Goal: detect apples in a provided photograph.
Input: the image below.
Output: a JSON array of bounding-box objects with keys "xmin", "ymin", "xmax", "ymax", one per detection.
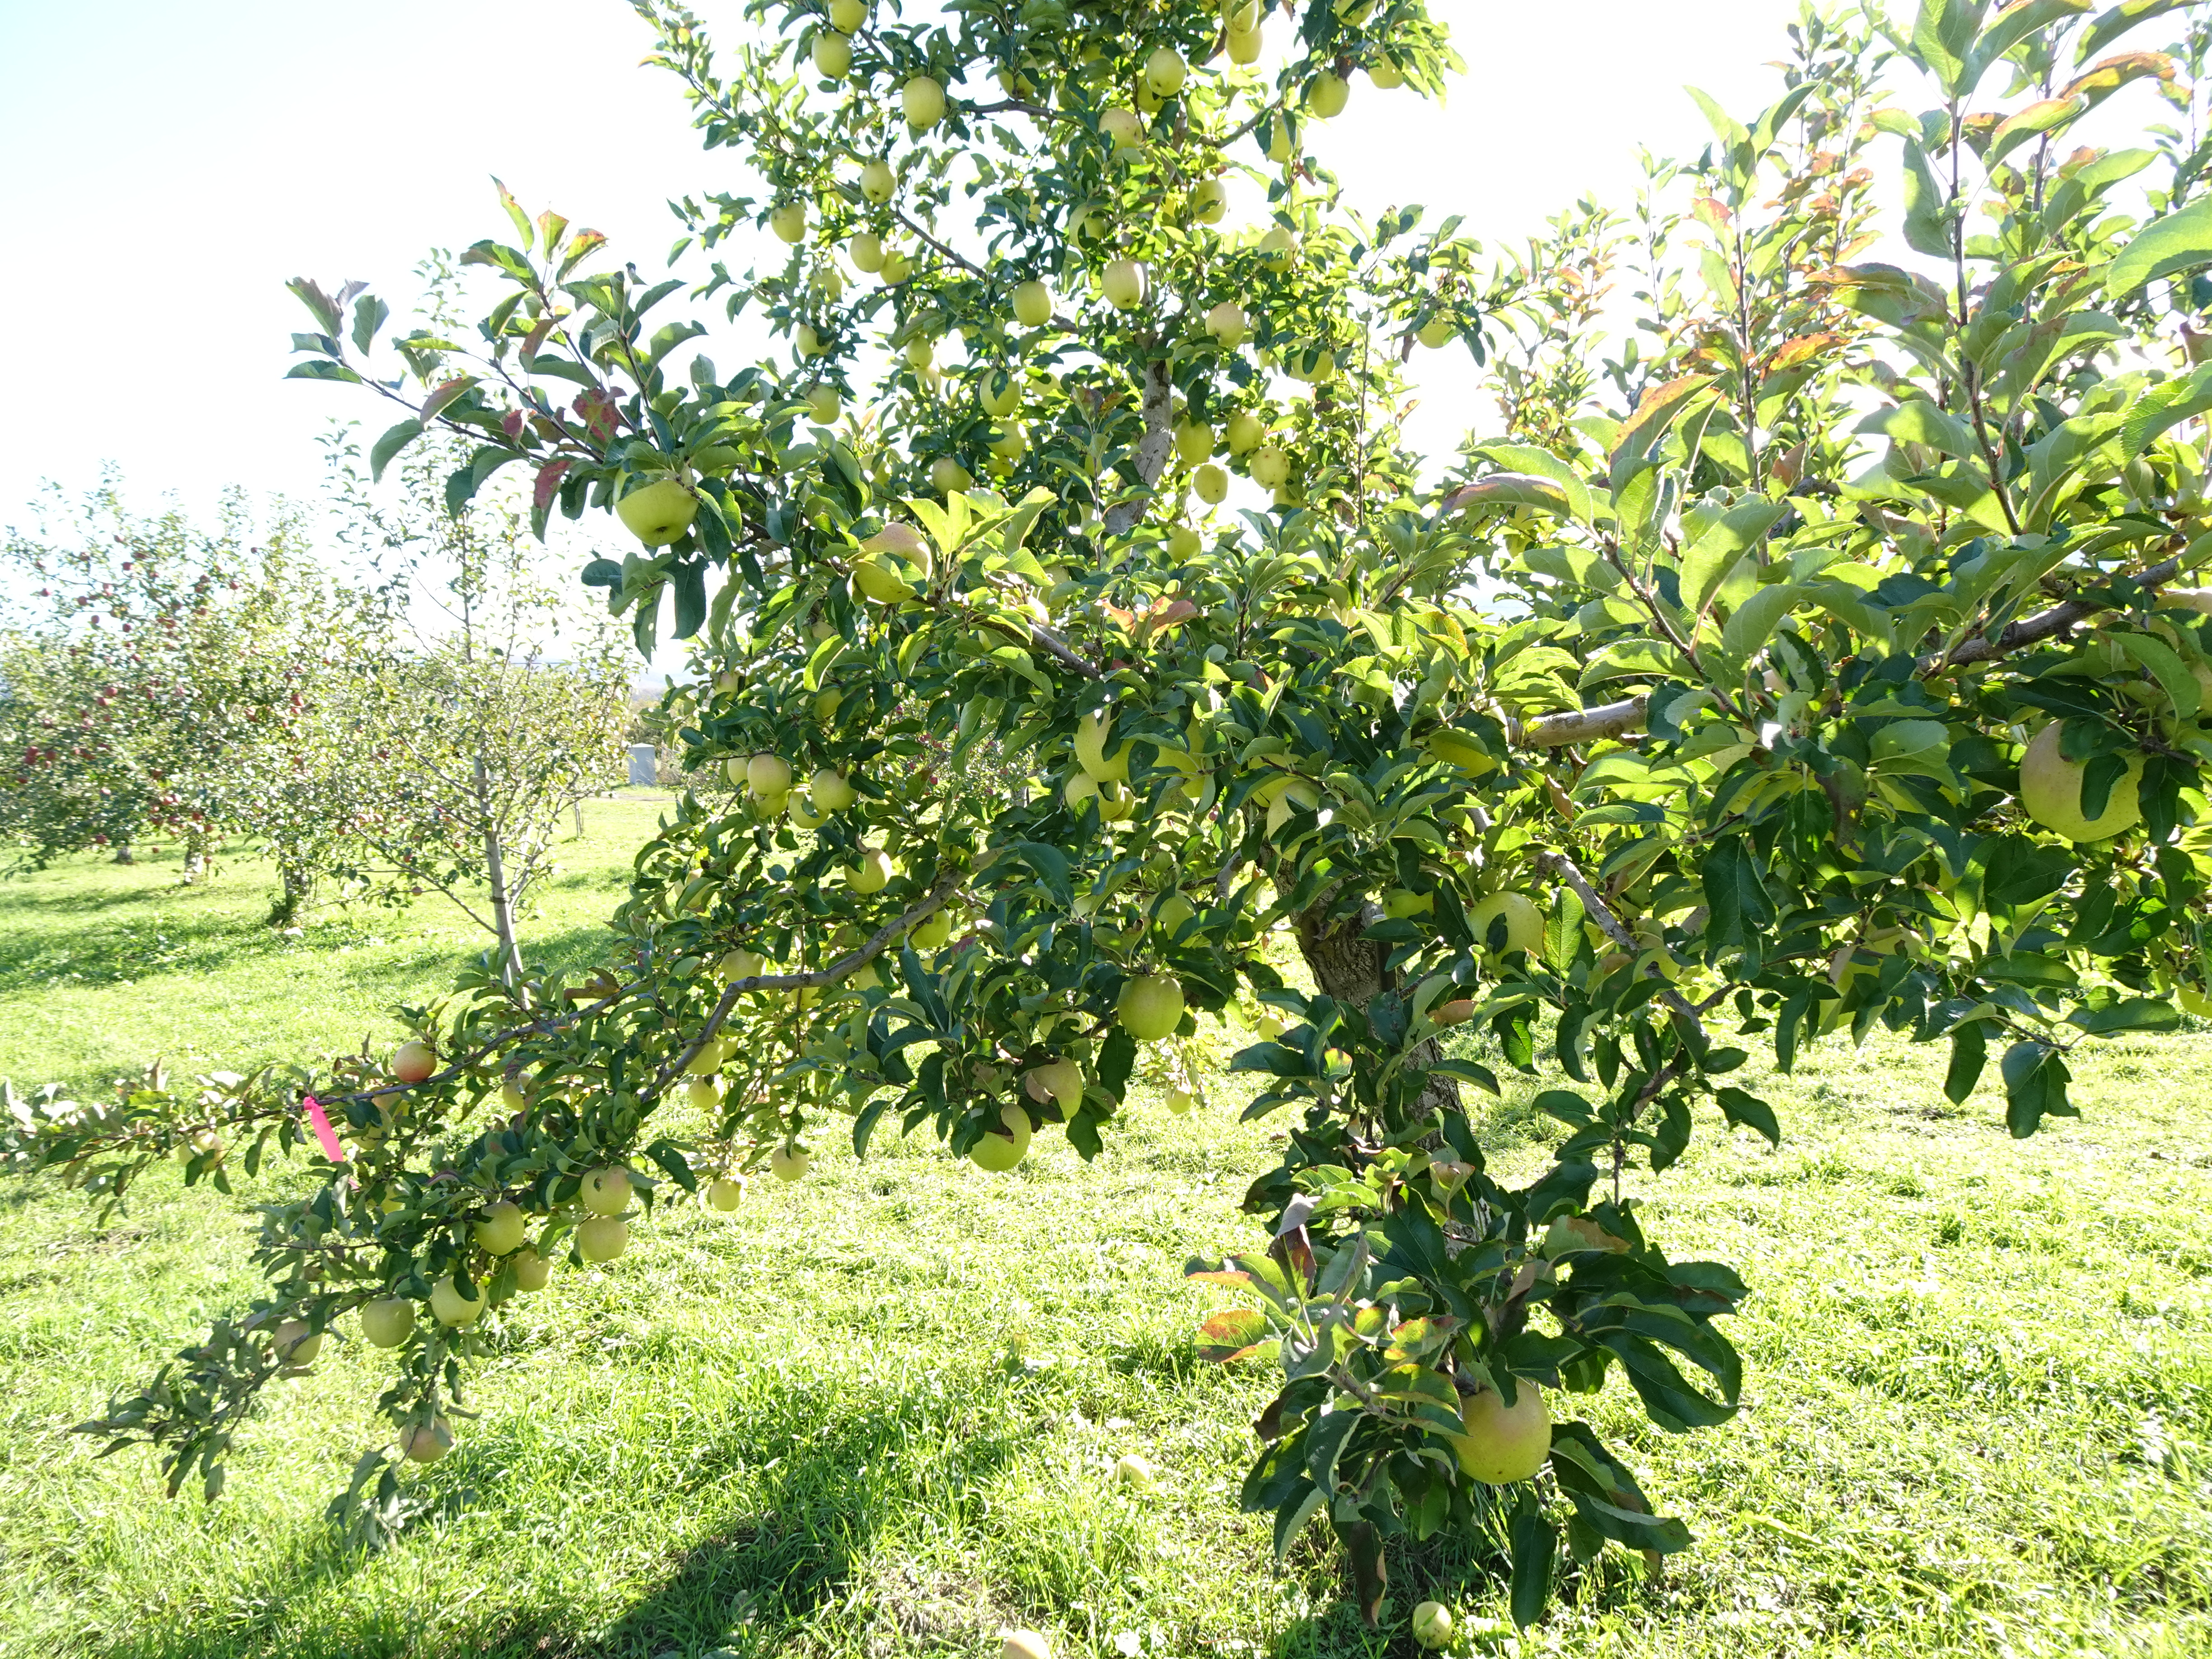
[
  {"xmin": 1259, "ymin": 226, "xmax": 1299, "ymax": 271},
  {"xmin": 1194, "ymin": 179, "xmax": 1231, "ymax": 225},
  {"xmin": 1374, "ymin": 480, "xmax": 1400, "ymax": 508},
  {"xmin": 1081, "ymin": 36, "xmax": 1119, "ymax": 73},
  {"xmin": 843, "ymin": 844, "xmax": 892, "ymax": 894},
  {"xmin": 2099, "ymin": 614, "xmax": 2181, "ymax": 671},
  {"xmin": 802, "ymin": 618, "xmax": 838, "ymax": 661},
  {"xmin": 344, "ymin": 1109, "xmax": 393, "ymax": 1151},
  {"xmin": 682, "ymin": 1031, "xmax": 726, "ymax": 1076},
  {"xmin": 1503, "ymin": 495, "xmax": 1543, "ymax": 533},
  {"xmin": 746, "ymin": 749, "xmax": 794, "ymax": 798},
  {"xmin": 272, "ymin": 1318, "xmax": 324, "ymax": 1367},
  {"xmin": 1308, "ymin": 70, "xmax": 1351, "ymax": 119},
  {"xmin": 1367, "ymin": 42, "xmax": 1406, "ymax": 91},
  {"xmin": 1014, "ymin": 281, "xmax": 1055, "ymax": 328},
  {"xmin": 859, "ymin": 155, "xmax": 900, "ymax": 205},
  {"xmin": 1064, "ymin": 766, "xmax": 1127, "ymax": 825},
  {"xmin": 755, "ymin": 786, "xmax": 792, "ymax": 823},
  {"xmin": 1018, "ymin": 0, "xmax": 1068, "ymax": 43},
  {"xmin": 771, "ymin": 1144, "xmax": 810, "ymax": 1185},
  {"xmin": 1165, "ymin": 524, "xmax": 1204, "ymax": 565},
  {"xmin": 1208, "ymin": 808, "xmax": 1222, "ymax": 822},
  {"xmin": 1811, "ymin": 420, "xmax": 1831, "ymax": 437},
  {"xmin": 362, "ymin": 1292, "xmax": 415, "ymax": 1349},
  {"xmin": 577, "ymin": 1218, "xmax": 628, "ymax": 1262},
  {"xmin": 1070, "ymin": 384, "xmax": 1106, "ymax": 418},
  {"xmin": 1100, "ymin": 786, "xmax": 1139, "ymax": 824},
  {"xmin": 1848, "ymin": 655, "xmax": 1858, "ymax": 665},
  {"xmin": 1426, "ymin": 693, "xmax": 1513, "ymax": 783},
  {"xmin": 277, "ymin": 718, "xmax": 290, "ymax": 729},
  {"xmin": 1098, "ymin": 109, "xmax": 1146, "ymax": 154},
  {"xmin": 177, "ymin": 1131, "xmax": 223, "ymax": 1172},
  {"xmin": 581, "ymin": 1166, "xmax": 634, "ymax": 1215},
  {"xmin": 1257, "ymin": 336, "xmax": 1288, "ymax": 371},
  {"xmin": 908, "ymin": 336, "xmax": 933, "ymax": 368},
  {"xmin": 1830, "ymin": 661, "xmax": 1843, "ymax": 674},
  {"xmin": 854, "ymin": 957, "xmax": 888, "ymax": 999},
  {"xmin": 1204, "ymin": 301, "xmax": 1247, "ymax": 348},
  {"xmin": 1056, "ymin": 74, "xmax": 1088, "ymax": 111},
  {"xmin": 1031, "ymin": 369, "xmax": 1063, "ymax": 413},
  {"xmin": 1240, "ymin": 671, "xmax": 1276, "ymax": 709},
  {"xmin": 834, "ymin": 921, "xmax": 864, "ymax": 945},
  {"xmin": 900, "ymin": 76, "xmax": 946, "ymax": 132},
  {"xmin": 1146, "ymin": 49, "xmax": 1187, "ymax": 95},
  {"xmin": 1446, "ymin": 849, "xmax": 1476, "ymax": 874},
  {"xmin": 811, "ymin": 31, "xmax": 855, "ymax": 77},
  {"xmin": 1261, "ymin": 108, "xmax": 1305, "ymax": 165},
  {"xmin": 851, "ymin": 522, "xmax": 933, "ymax": 603},
  {"xmin": 706, "ymin": 1178, "xmax": 747, "ymax": 1213},
  {"xmin": 1117, "ymin": 969, "xmax": 1186, "ymax": 1041},
  {"xmin": 1381, "ymin": 865, "xmax": 1448, "ymax": 935},
  {"xmin": 796, "ymin": 323, "xmax": 835, "ymax": 357},
  {"xmin": 675, "ymin": 867, "xmax": 716, "ymax": 911},
  {"xmin": 1192, "ymin": 463, "xmax": 1229, "ymax": 504},
  {"xmin": 1229, "ymin": 406, "xmax": 1266, "ymax": 455},
  {"xmin": 585, "ymin": 1063, "xmax": 614, "ymax": 1085},
  {"xmin": 2173, "ymin": 659, "xmax": 2212, "ymax": 724},
  {"xmin": 980, "ymin": 370, "xmax": 1024, "ymax": 414},
  {"xmin": 1004, "ymin": 187, "xmax": 1043, "ymax": 227},
  {"xmin": 1131, "ymin": 75, "xmax": 1169, "ymax": 111},
  {"xmin": 1174, "ymin": 414, "xmax": 1215, "ymax": 463},
  {"xmin": 611, "ymin": 456, "xmax": 700, "ymax": 549},
  {"xmin": 995, "ymin": 877, "xmax": 1030, "ymax": 904},
  {"xmin": 457, "ymin": 1295, "xmax": 494, "ymax": 1334},
  {"xmin": 959, "ymin": 311, "xmax": 1007, "ymax": 349},
  {"xmin": 2020, "ymin": 710, "xmax": 2159, "ymax": 845},
  {"xmin": 807, "ymin": 266, "xmax": 843, "ymax": 310},
  {"xmin": 1162, "ymin": 1078, "xmax": 1199, "ymax": 1119},
  {"xmin": 1335, "ymin": 0, "xmax": 1378, "ymax": 26},
  {"xmin": 1265, "ymin": 778, "xmax": 1351, "ymax": 866},
  {"xmin": 1099, "ymin": 257, "xmax": 1147, "ymax": 311},
  {"xmin": 558, "ymin": 1195, "xmax": 592, "ymax": 1229},
  {"xmin": 366, "ymin": 1177, "xmax": 407, "ymax": 1217},
  {"xmin": 987, "ymin": 421, "xmax": 1030, "ymax": 462},
  {"xmin": 1247, "ymin": 753, "xmax": 1313, "ymax": 808},
  {"xmin": 585, "ymin": 976, "xmax": 624, "ymax": 1000},
  {"xmin": 1464, "ymin": 887, "xmax": 1551, "ymax": 974},
  {"xmin": 849, "ymin": 227, "xmax": 889, "ymax": 275},
  {"xmin": 1410, "ymin": 1600, "xmax": 1456, "ymax": 1645},
  {"xmin": 1751, "ymin": 666, "xmax": 1803, "ymax": 714},
  {"xmin": 1068, "ymin": 199, "xmax": 1118, "ymax": 250},
  {"xmin": 1827, "ymin": 936, "xmax": 1888, "ymax": 1000},
  {"xmin": 1438, "ymin": 1362, "xmax": 1553, "ymax": 1489},
  {"xmin": 1020, "ymin": 563, "xmax": 1071, "ymax": 610},
  {"xmin": 786, "ymin": 971, "xmax": 830, "ymax": 1009},
  {"xmin": 551, "ymin": 1016, "xmax": 576, "ymax": 1036},
  {"xmin": 686, "ymin": 1078, "xmax": 727, "ymax": 1109},
  {"xmin": 827, "ymin": 0, "xmax": 873, "ymax": 32},
  {"xmin": 501, "ymin": 1068, "xmax": 546, "ymax": 1115},
  {"xmin": 1155, "ymin": 896, "xmax": 1200, "ymax": 947},
  {"xmin": 1863, "ymin": 926, "xmax": 1927, "ymax": 972},
  {"xmin": 504, "ymin": 1248, "xmax": 555, "ymax": 1293},
  {"xmin": 813, "ymin": 681, "xmax": 847, "ymax": 725},
  {"xmin": 1219, "ymin": 0, "xmax": 1261, "ymax": 28},
  {"xmin": 399, "ymin": 1411, "xmax": 455, "ymax": 1465},
  {"xmin": 812, "ymin": 176, "xmax": 846, "ymax": 214},
  {"xmin": 73, "ymin": 1102, "xmax": 110, "ymax": 1138},
  {"xmin": 1137, "ymin": 705, "xmax": 1224, "ymax": 802},
  {"xmin": 1035, "ymin": 1003, "xmax": 1090, "ymax": 1058},
  {"xmin": 722, "ymin": 947, "xmax": 766, "ymax": 994},
  {"xmin": 959, "ymin": 1100, "xmax": 1033, "ymax": 1174},
  {"xmin": 728, "ymin": 746, "xmax": 763, "ymax": 789},
  {"xmin": 114, "ymin": 1077, "xmax": 144, "ymax": 1099},
  {"xmin": 430, "ymin": 1173, "xmax": 465, "ymax": 1213},
  {"xmin": 1514, "ymin": 398, "xmax": 1551, "ymax": 432},
  {"xmin": 1159, "ymin": 0, "xmax": 1195, "ymax": 24},
  {"xmin": 809, "ymin": 766, "xmax": 862, "ymax": 815},
  {"xmin": 716, "ymin": 665, "xmax": 753, "ymax": 706},
  {"xmin": 1142, "ymin": 596, "xmax": 1182, "ymax": 628},
  {"xmin": 1548, "ymin": 264, "xmax": 1590, "ymax": 293},
  {"xmin": 954, "ymin": 933, "xmax": 996, "ymax": 965},
  {"xmin": 770, "ymin": 200, "xmax": 806, "ymax": 244},
  {"xmin": 1617, "ymin": 930, "xmax": 1678, "ymax": 997},
  {"xmin": 1226, "ymin": 27, "xmax": 1265, "ymax": 66},
  {"xmin": 1282, "ymin": 332, "xmax": 1334, "ymax": 384},
  {"xmin": 1169, "ymin": 249, "xmax": 1211, "ymax": 295},
  {"xmin": 366, "ymin": 1088, "xmax": 412, "ymax": 1129},
  {"xmin": 1590, "ymin": 952, "xmax": 1643, "ymax": 1008},
  {"xmin": 1070, "ymin": 36, "xmax": 1099, "ymax": 82},
  {"xmin": 1411, "ymin": 302, "xmax": 1459, "ymax": 350},
  {"xmin": 931, "ymin": 453, "xmax": 978, "ymax": 499},
  {"xmin": 1837, "ymin": 657, "xmax": 1848, "ymax": 668},
  {"xmin": 391, "ymin": 1043, "xmax": 438, "ymax": 1086},
  {"xmin": 472, "ymin": 1201, "xmax": 527, "ymax": 1256},
  {"xmin": 434, "ymin": 1273, "xmax": 487, "ymax": 1330},
  {"xmin": 1022, "ymin": 1054, "xmax": 1085, "ymax": 1125},
  {"xmin": 905, "ymin": 904, "xmax": 953, "ymax": 951},
  {"xmin": 755, "ymin": 1088, "xmax": 786, "ymax": 1122},
  {"xmin": 1274, "ymin": 479, "xmax": 1314, "ymax": 521},
  {"xmin": 788, "ymin": 778, "xmax": 831, "ymax": 831},
  {"xmin": 1104, "ymin": 657, "xmax": 1137, "ymax": 692},
  {"xmin": 1251, "ymin": 445, "xmax": 1292, "ymax": 490},
  {"xmin": 635, "ymin": 947, "xmax": 656, "ymax": 968},
  {"xmin": 1313, "ymin": 604, "xmax": 1349, "ymax": 637},
  {"xmin": 878, "ymin": 246, "xmax": 911, "ymax": 287},
  {"xmin": 806, "ymin": 381, "xmax": 843, "ymax": 425},
  {"xmin": 996, "ymin": 52, "xmax": 1039, "ymax": 101},
  {"xmin": 1163, "ymin": 338, "xmax": 1201, "ymax": 382},
  {"xmin": 1090, "ymin": 375, "xmax": 1127, "ymax": 406}
]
